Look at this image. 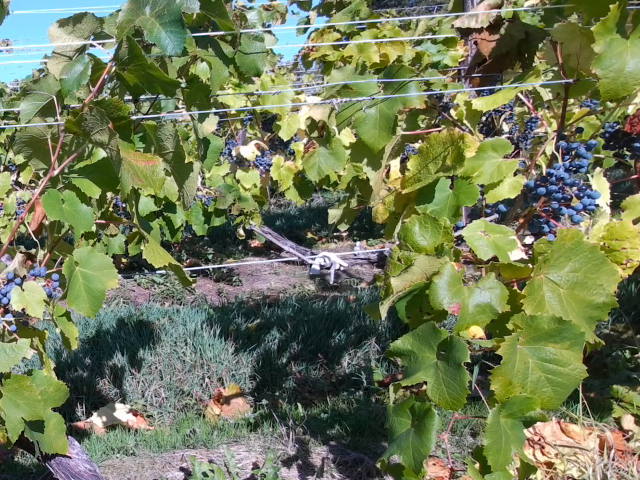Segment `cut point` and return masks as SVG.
<instances>
[{
  "label": "cut point",
  "instance_id": "6a23745f",
  "mask_svg": "<svg viewBox=\"0 0 640 480\" xmlns=\"http://www.w3.org/2000/svg\"><path fill=\"white\" fill-rule=\"evenodd\" d=\"M23 223H24V224L26 225V227L28 228V230H29V232H30V234H31V237H32L33 241L37 244V248H40V241L35 237V235H34V231H33L32 227H31V225H30L26 220H23Z\"/></svg>",
  "mask_w": 640,
  "mask_h": 480
}]
</instances>
